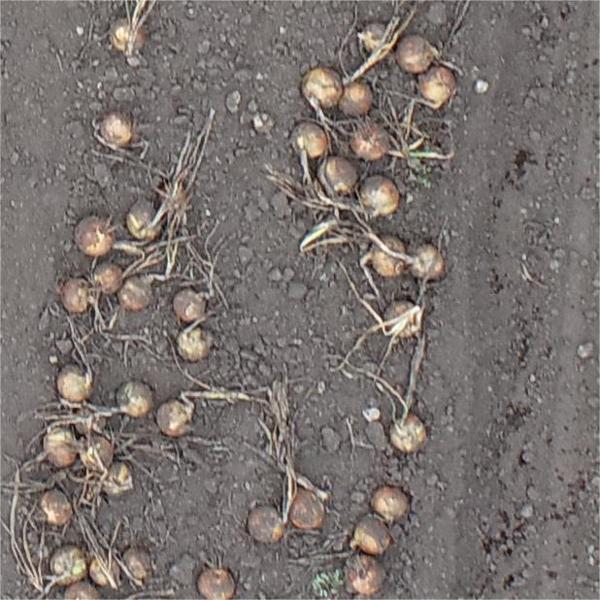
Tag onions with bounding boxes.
[63,578,98,600]
[155,397,190,437]
[301,67,342,108]
[407,244,444,279]
[366,235,406,277]
[112,24,141,51]
[116,379,152,417]
[93,263,122,292]
[102,463,131,493]
[388,414,426,451]
[359,175,400,215]
[345,121,385,161]
[321,155,358,192]
[245,504,282,543]
[289,491,325,529]
[88,556,117,585]
[174,289,205,321]
[371,484,409,522]
[397,35,433,73]
[37,490,69,524]
[119,280,150,310]
[291,122,329,158]
[59,279,94,313]
[351,515,389,555]
[43,428,77,467]
[177,327,210,361]
[96,109,132,147]
[48,543,87,583]
[196,569,234,600]
[81,434,111,469]
[339,81,372,114]
[124,209,155,239]
[55,364,92,401]
[342,557,382,593]
[382,302,419,337]
[120,544,154,581]
[358,25,387,55]
[416,67,456,107]
[74,216,113,256]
